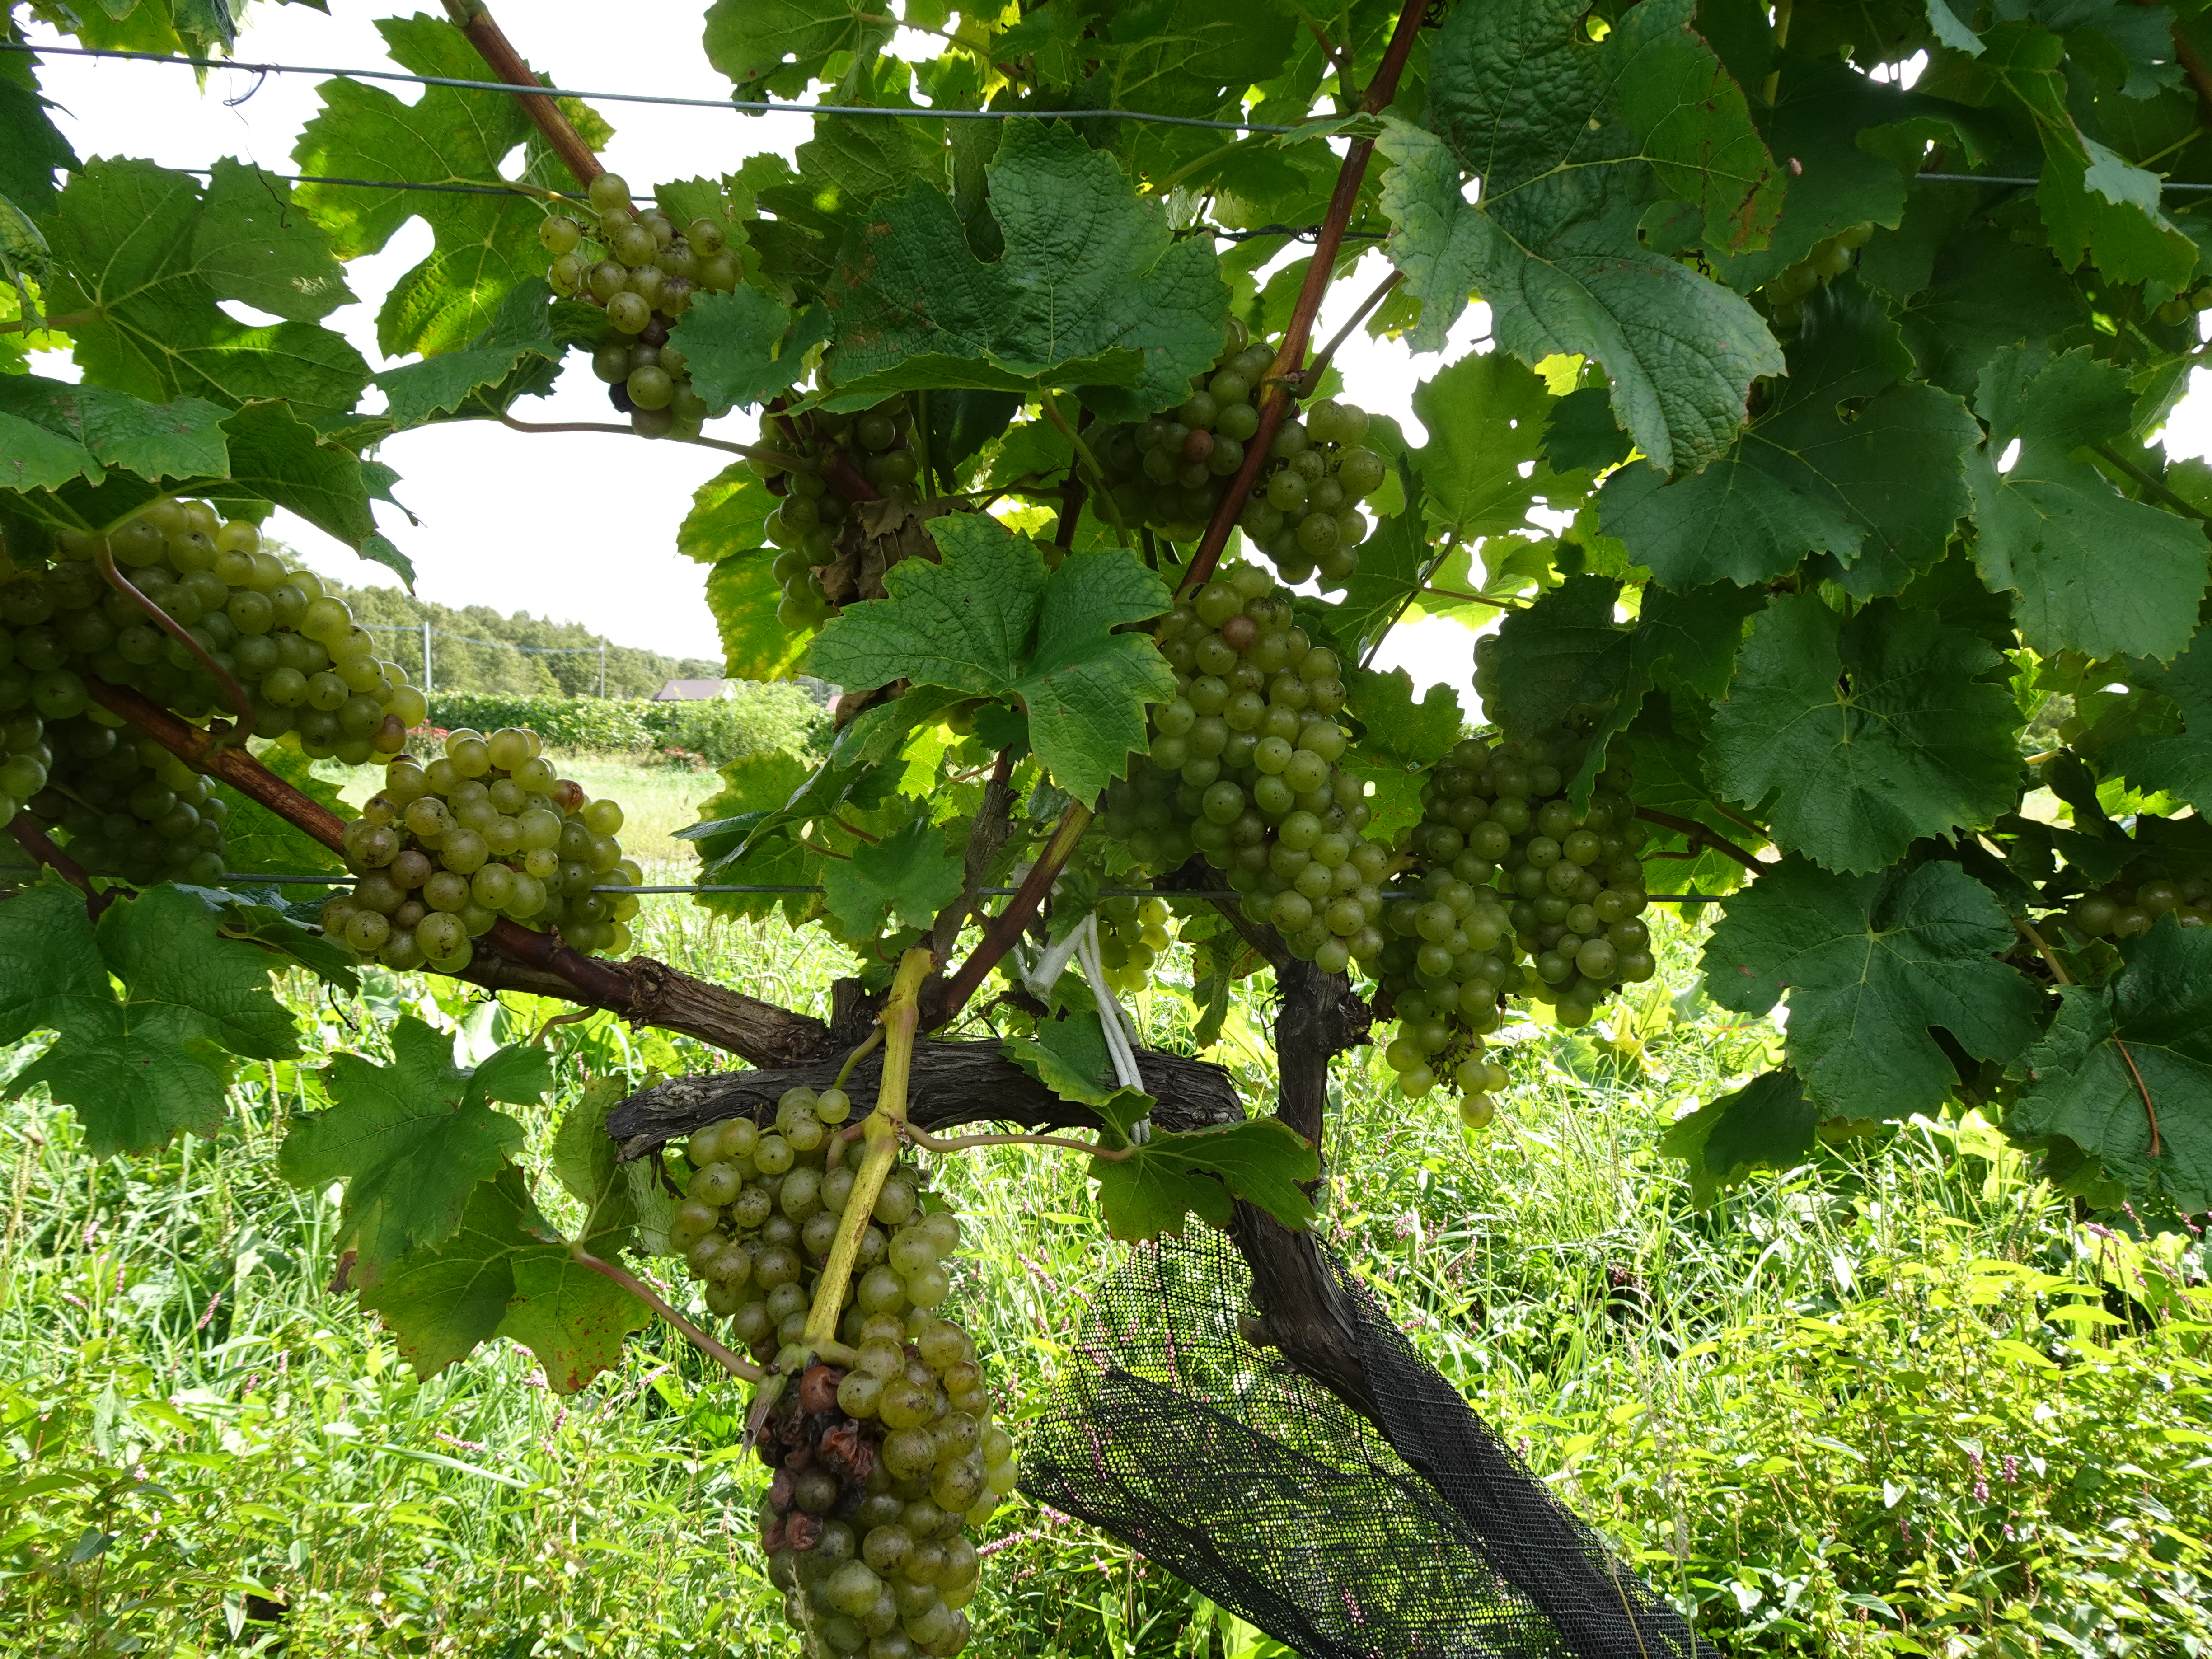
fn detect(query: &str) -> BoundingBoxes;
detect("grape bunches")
[538,173,744,442]
[2158,284,2211,328]
[1242,398,1386,585]
[1104,753,1198,861]
[1818,1116,1879,1144]
[1385,868,1528,1128]
[1359,740,1534,994]
[1031,539,1074,575]
[742,1320,1018,1659]
[1082,866,1171,996]
[320,729,561,973]
[27,710,228,888]
[745,366,918,633]
[2038,854,2212,952]
[1498,729,1655,1030]
[1076,316,1296,542]
[47,499,428,767]
[927,696,1005,736]
[669,1085,959,1380]
[0,560,88,830]
[1766,221,1876,327]
[1150,564,1393,974]
[529,779,643,957]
